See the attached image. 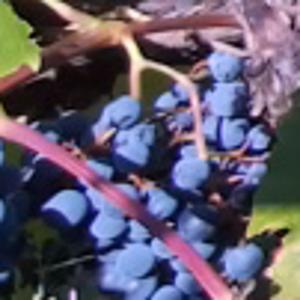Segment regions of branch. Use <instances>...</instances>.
I'll use <instances>...</instances> for the list:
<instances>
[{
    "instance_id": "obj_1",
    "label": "branch",
    "mask_w": 300,
    "mask_h": 300,
    "mask_svg": "<svg viewBox=\"0 0 300 300\" xmlns=\"http://www.w3.org/2000/svg\"><path fill=\"white\" fill-rule=\"evenodd\" d=\"M0 137L55 161L62 166L63 175L66 178L89 186L111 200L114 205L133 218V223L139 226L148 237L162 240V243L190 270V275L198 286L206 291L210 300H235L233 294L197 250H190L177 241L176 232L163 222H154L147 217L146 211L137 200L125 195L120 187H114L95 170L77 163L55 140L39 130L6 116H0Z\"/></svg>"
},
{
    "instance_id": "obj_2",
    "label": "branch",
    "mask_w": 300,
    "mask_h": 300,
    "mask_svg": "<svg viewBox=\"0 0 300 300\" xmlns=\"http://www.w3.org/2000/svg\"><path fill=\"white\" fill-rule=\"evenodd\" d=\"M238 30L240 21L235 16L163 17L146 21L128 18H106L101 22L75 29L71 35L41 49L40 74L71 57L88 50L116 47L139 35L166 34L181 29Z\"/></svg>"
},
{
    "instance_id": "obj_3",
    "label": "branch",
    "mask_w": 300,
    "mask_h": 300,
    "mask_svg": "<svg viewBox=\"0 0 300 300\" xmlns=\"http://www.w3.org/2000/svg\"><path fill=\"white\" fill-rule=\"evenodd\" d=\"M35 80V72L28 64H22L16 72L6 74L0 79V100L15 91L21 85Z\"/></svg>"
}]
</instances>
